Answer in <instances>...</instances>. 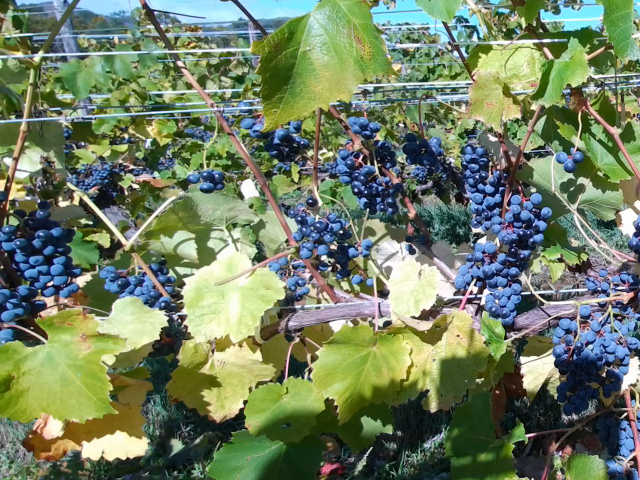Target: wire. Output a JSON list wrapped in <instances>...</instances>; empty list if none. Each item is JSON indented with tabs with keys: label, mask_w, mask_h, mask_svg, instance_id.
<instances>
[{
	"label": "wire",
	"mask_w": 640,
	"mask_h": 480,
	"mask_svg": "<svg viewBox=\"0 0 640 480\" xmlns=\"http://www.w3.org/2000/svg\"><path fill=\"white\" fill-rule=\"evenodd\" d=\"M251 47H203L186 49H170L160 48L156 50H139L124 52H107V51H87V52H55L43 53L38 55H3L0 54V60H40L45 58L57 57H89V56H105V57H126L141 55H158L162 53L168 54H186L188 53H205V52H251Z\"/></svg>",
	"instance_id": "2"
},
{
	"label": "wire",
	"mask_w": 640,
	"mask_h": 480,
	"mask_svg": "<svg viewBox=\"0 0 640 480\" xmlns=\"http://www.w3.org/2000/svg\"><path fill=\"white\" fill-rule=\"evenodd\" d=\"M334 302H325V303H301V304H292V305H276L272 307L273 311L278 310H294V309H303V308H327L334 307Z\"/></svg>",
	"instance_id": "5"
},
{
	"label": "wire",
	"mask_w": 640,
	"mask_h": 480,
	"mask_svg": "<svg viewBox=\"0 0 640 480\" xmlns=\"http://www.w3.org/2000/svg\"><path fill=\"white\" fill-rule=\"evenodd\" d=\"M470 97L469 93L460 95H424V96H400V97H386L381 99H365V100H351V105H367V104H383L388 102H402V101H426V100H462Z\"/></svg>",
	"instance_id": "4"
},
{
	"label": "wire",
	"mask_w": 640,
	"mask_h": 480,
	"mask_svg": "<svg viewBox=\"0 0 640 480\" xmlns=\"http://www.w3.org/2000/svg\"><path fill=\"white\" fill-rule=\"evenodd\" d=\"M262 109H263L262 105H244V106H228V107H215V108H191V109H179V110H157V111H142V112L92 113V114H84V115H56L51 117H23V118L0 119V124L25 123V122H54L58 120H86V119H94V118H125V117L157 116V115H181V114H193V113H218V112L262 110Z\"/></svg>",
	"instance_id": "1"
},
{
	"label": "wire",
	"mask_w": 640,
	"mask_h": 480,
	"mask_svg": "<svg viewBox=\"0 0 640 480\" xmlns=\"http://www.w3.org/2000/svg\"><path fill=\"white\" fill-rule=\"evenodd\" d=\"M538 42H563L570 43V40L565 37H536V38H523V39H505V40H487L481 42L471 41H441V42H418V43H388V48H421V47H443V46H469V47H484L489 45H507V44H525V43H538Z\"/></svg>",
	"instance_id": "3"
},
{
	"label": "wire",
	"mask_w": 640,
	"mask_h": 480,
	"mask_svg": "<svg viewBox=\"0 0 640 480\" xmlns=\"http://www.w3.org/2000/svg\"><path fill=\"white\" fill-rule=\"evenodd\" d=\"M626 84H640V79H623V80H613L609 82H600L596 84H584V89H598L603 87H611L615 85H626Z\"/></svg>",
	"instance_id": "6"
}]
</instances>
